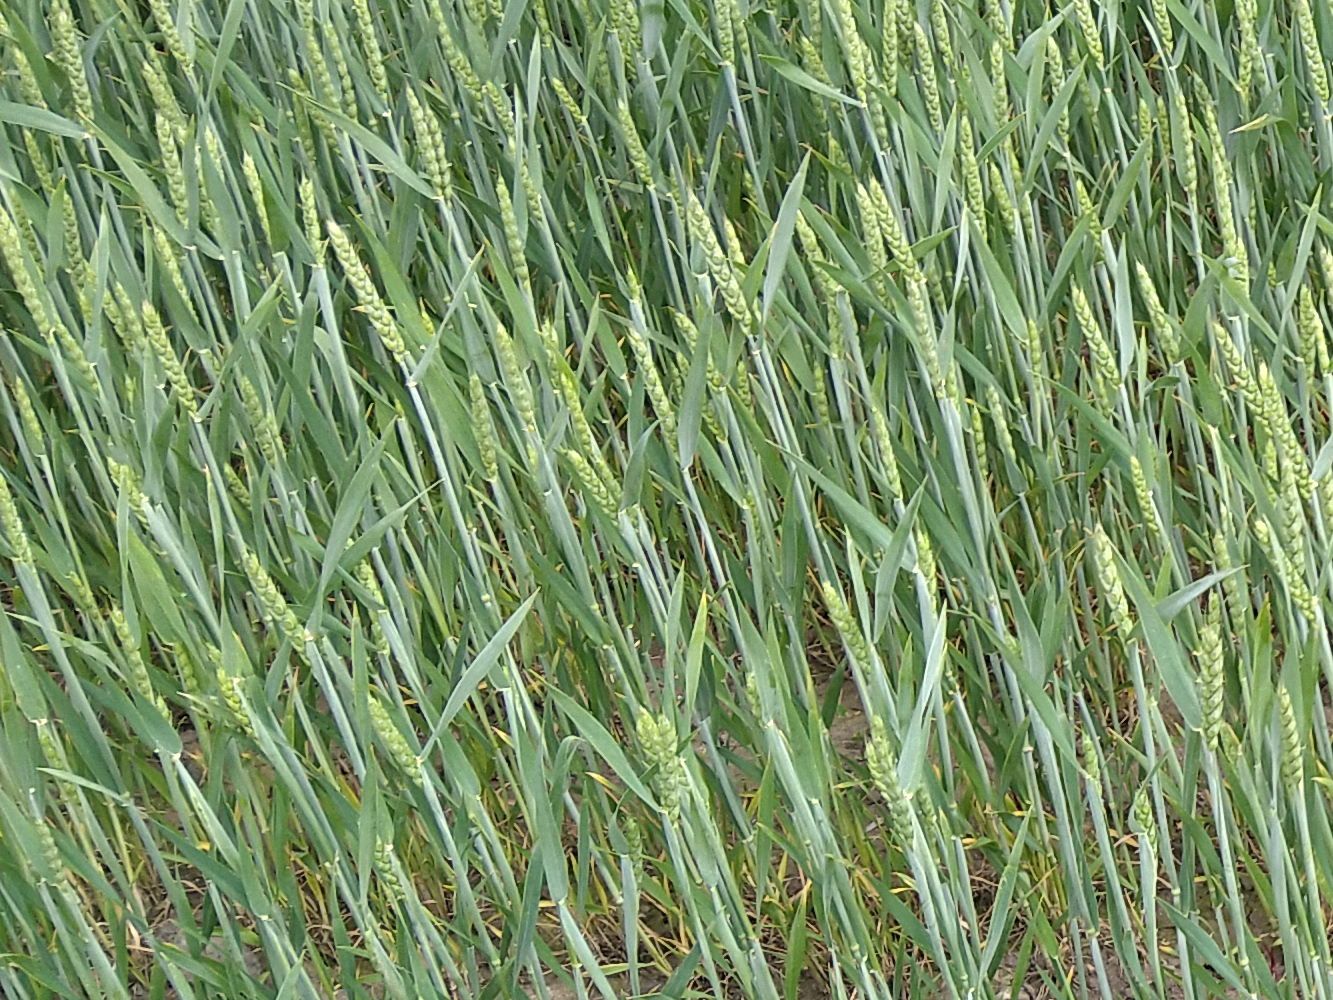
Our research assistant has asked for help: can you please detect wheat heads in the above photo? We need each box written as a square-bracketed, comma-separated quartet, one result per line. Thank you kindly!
[867, 405, 902, 502]
[741, 169, 761, 207]
[675, 761, 690, 787]
[1083, 733, 1097, 781]
[992, 41, 1004, 133]
[917, 530, 933, 594]
[153, 226, 195, 321]
[12, 378, 46, 453]
[1253, 521, 1314, 623]
[1239, 37, 1252, 87]
[40, 724, 82, 814]
[987, 167, 1018, 238]
[1197, 628, 1221, 748]
[518, 166, 543, 220]
[1094, 370, 1113, 421]
[1235, 0, 1269, 84]
[747, 490, 763, 552]
[932, 276, 946, 317]
[324, 22, 360, 124]
[1261, 367, 1316, 507]
[551, 78, 582, 119]
[688, 192, 747, 325]
[408, 105, 454, 206]
[144, 62, 189, 130]
[1089, 526, 1135, 635]
[54, 321, 104, 400]
[1010, 153, 1033, 234]
[423, 309, 433, 340]
[746, 669, 768, 721]
[795, 211, 831, 291]
[109, 605, 154, 711]
[869, 174, 925, 280]
[865, 741, 917, 843]
[1028, 319, 1043, 387]
[1135, 262, 1180, 364]
[1211, 150, 1242, 257]
[244, 155, 267, 232]
[486, 80, 513, 132]
[1078, 182, 1104, 249]
[1140, 101, 1155, 162]
[1177, 93, 1195, 190]
[300, 176, 320, 256]
[158, 694, 173, 721]
[1061, 0, 1108, 67]
[497, 323, 543, 468]
[1048, 40, 1067, 140]
[494, 177, 529, 296]
[471, 374, 497, 474]
[529, 0, 555, 43]
[289, 91, 317, 169]
[839, 0, 863, 86]
[423, 0, 456, 61]
[192, 145, 217, 221]
[597, 47, 635, 94]
[1284, 0, 1298, 12]
[625, 326, 679, 465]
[626, 265, 638, 303]
[901, 280, 946, 394]
[542, 320, 564, 385]
[855, 185, 887, 303]
[1294, 288, 1313, 357]
[1232, 0, 1259, 17]
[207, 128, 225, 183]
[659, 718, 678, 818]
[960, 115, 991, 242]
[1218, 721, 1241, 766]
[73, 575, 105, 628]
[0, 478, 36, 567]
[11, 49, 49, 113]
[1279, 688, 1301, 785]
[800, 37, 846, 129]
[1322, 249, 1333, 357]
[1211, 533, 1246, 636]
[315, 112, 344, 165]
[710, 0, 735, 59]
[1158, 97, 1173, 155]
[154, 112, 189, 218]
[1278, 471, 1306, 574]
[676, 354, 727, 438]
[970, 406, 989, 482]
[1249, 189, 1255, 227]
[238, 374, 281, 470]
[1130, 453, 1161, 543]
[1144, 0, 1171, 54]
[373, 836, 406, 902]
[346, 542, 389, 652]
[1262, 595, 1276, 638]
[449, 45, 488, 109]
[823, 265, 845, 355]
[56, 11, 96, 125]
[408, 102, 422, 105]
[87, 262, 141, 356]
[141, 301, 197, 415]
[1199, 100, 1228, 162]
[623, 817, 640, 898]
[277, 267, 297, 315]
[815, 358, 829, 423]
[881, 0, 899, 96]
[873, 0, 921, 37]
[296, 0, 317, 34]
[141, 0, 179, 62]
[1070, 287, 1115, 379]
[0, 208, 52, 338]
[304, 34, 340, 118]
[1214, 326, 1273, 438]
[1208, 593, 1219, 629]
[729, 0, 749, 50]
[938, 354, 956, 400]
[560, 381, 622, 491]
[897, 30, 918, 66]
[1134, 783, 1155, 852]
[616, 100, 650, 179]
[218, 670, 259, 742]
[109, 460, 145, 519]
[114, 280, 149, 354]
[671, 314, 725, 389]
[634, 709, 660, 774]
[460, 0, 480, 24]
[1310, 310, 1332, 375]
[369, 696, 423, 789]
[914, 22, 943, 140]
[59, 193, 85, 294]
[226, 466, 253, 512]
[822, 582, 870, 681]
[985, 383, 1017, 462]
[1323, 468, 1333, 555]
[1295, 0, 1327, 102]
[31, 797, 68, 893]
[732, 361, 756, 419]
[9, 191, 48, 284]
[246, 555, 308, 665]
[22, 127, 59, 202]
[725, 220, 759, 317]
[599, 0, 641, 55]
[914, 781, 938, 821]
[859, 38, 891, 152]
[352, 0, 392, 100]
[929, 0, 951, 68]
[328, 224, 401, 353]
[1071, 49, 1098, 126]
[983, 0, 1007, 45]
[174, 642, 206, 726]
[804, 0, 824, 56]
[564, 450, 619, 516]
[80, 269, 97, 338]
